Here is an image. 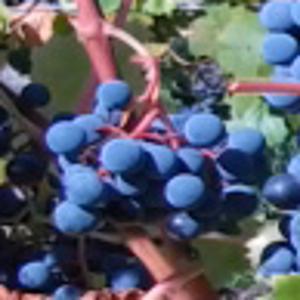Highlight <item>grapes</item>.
<instances>
[{
  "label": "grapes",
  "mask_w": 300,
  "mask_h": 300,
  "mask_svg": "<svg viewBox=\"0 0 300 300\" xmlns=\"http://www.w3.org/2000/svg\"><path fill=\"white\" fill-rule=\"evenodd\" d=\"M94 112H58L40 135L42 152L60 175L47 212L56 232L79 236L100 218L96 203L135 197L156 179L171 241H192L203 219L223 210L245 217L259 206L257 189L242 184L266 165V136L251 128L224 132L209 112L172 114L155 85L140 93L124 79L101 83Z\"/></svg>",
  "instance_id": "grapes-1"
},
{
  "label": "grapes",
  "mask_w": 300,
  "mask_h": 300,
  "mask_svg": "<svg viewBox=\"0 0 300 300\" xmlns=\"http://www.w3.org/2000/svg\"><path fill=\"white\" fill-rule=\"evenodd\" d=\"M262 198L275 208L291 211L280 224L287 242L270 243L259 254L265 275H300V152L286 164V174H271L260 183Z\"/></svg>",
  "instance_id": "grapes-2"
},
{
  "label": "grapes",
  "mask_w": 300,
  "mask_h": 300,
  "mask_svg": "<svg viewBox=\"0 0 300 300\" xmlns=\"http://www.w3.org/2000/svg\"><path fill=\"white\" fill-rule=\"evenodd\" d=\"M260 20L266 32L263 58L272 66L271 78L300 83V3L271 1L262 5Z\"/></svg>",
  "instance_id": "grapes-3"
},
{
  "label": "grapes",
  "mask_w": 300,
  "mask_h": 300,
  "mask_svg": "<svg viewBox=\"0 0 300 300\" xmlns=\"http://www.w3.org/2000/svg\"><path fill=\"white\" fill-rule=\"evenodd\" d=\"M6 174L14 185L0 186V216H16L23 212L27 196L15 185H30L38 181L43 174V166L37 155L21 152L9 161Z\"/></svg>",
  "instance_id": "grapes-4"
},
{
  "label": "grapes",
  "mask_w": 300,
  "mask_h": 300,
  "mask_svg": "<svg viewBox=\"0 0 300 300\" xmlns=\"http://www.w3.org/2000/svg\"><path fill=\"white\" fill-rule=\"evenodd\" d=\"M62 262L58 250H41L28 261H19L15 265V281L23 293H43L51 284L52 271Z\"/></svg>",
  "instance_id": "grapes-5"
},
{
  "label": "grapes",
  "mask_w": 300,
  "mask_h": 300,
  "mask_svg": "<svg viewBox=\"0 0 300 300\" xmlns=\"http://www.w3.org/2000/svg\"><path fill=\"white\" fill-rule=\"evenodd\" d=\"M105 283L110 291H129L149 289L153 280L147 263L133 260L111 267L105 274Z\"/></svg>",
  "instance_id": "grapes-6"
},
{
  "label": "grapes",
  "mask_w": 300,
  "mask_h": 300,
  "mask_svg": "<svg viewBox=\"0 0 300 300\" xmlns=\"http://www.w3.org/2000/svg\"><path fill=\"white\" fill-rule=\"evenodd\" d=\"M20 100L35 109L41 108L50 102V92L40 83L25 84L20 93Z\"/></svg>",
  "instance_id": "grapes-7"
},
{
  "label": "grapes",
  "mask_w": 300,
  "mask_h": 300,
  "mask_svg": "<svg viewBox=\"0 0 300 300\" xmlns=\"http://www.w3.org/2000/svg\"><path fill=\"white\" fill-rule=\"evenodd\" d=\"M262 100L273 110L287 111L290 114L300 113L299 95H271L269 92H264Z\"/></svg>",
  "instance_id": "grapes-8"
},
{
  "label": "grapes",
  "mask_w": 300,
  "mask_h": 300,
  "mask_svg": "<svg viewBox=\"0 0 300 300\" xmlns=\"http://www.w3.org/2000/svg\"><path fill=\"white\" fill-rule=\"evenodd\" d=\"M12 147V117L0 105V157L8 155Z\"/></svg>",
  "instance_id": "grapes-9"
},
{
  "label": "grapes",
  "mask_w": 300,
  "mask_h": 300,
  "mask_svg": "<svg viewBox=\"0 0 300 300\" xmlns=\"http://www.w3.org/2000/svg\"><path fill=\"white\" fill-rule=\"evenodd\" d=\"M83 288L76 283H65L58 286L53 293V300H81Z\"/></svg>",
  "instance_id": "grapes-10"
}]
</instances>
